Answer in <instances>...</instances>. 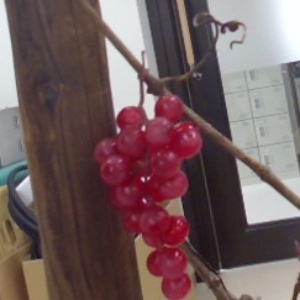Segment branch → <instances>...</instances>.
Returning a JSON list of instances; mask_svg holds the SVG:
<instances>
[{
    "instance_id": "obj_1",
    "label": "branch",
    "mask_w": 300,
    "mask_h": 300,
    "mask_svg": "<svg viewBox=\"0 0 300 300\" xmlns=\"http://www.w3.org/2000/svg\"><path fill=\"white\" fill-rule=\"evenodd\" d=\"M185 105V113L188 114L195 122H197L206 131H209L216 140L219 141L225 148H227L234 156L245 165H247L251 171L255 172L257 176L261 178V181L267 183L275 192L281 195L284 199L292 203L298 210H300V197L297 196L290 187L281 182L277 176H275L269 169L259 165L252 161L247 154H245L235 143H233L229 137L223 135L214 126L204 120L198 113H196L191 107Z\"/></svg>"
},
{
    "instance_id": "obj_2",
    "label": "branch",
    "mask_w": 300,
    "mask_h": 300,
    "mask_svg": "<svg viewBox=\"0 0 300 300\" xmlns=\"http://www.w3.org/2000/svg\"><path fill=\"white\" fill-rule=\"evenodd\" d=\"M203 15H208V11H201L197 13L195 16L192 18V24L194 27L201 26L205 23H207L209 20L212 22H215L216 26V37L213 40V43L211 44L210 48L207 50V52L201 57L199 62L191 68L189 72H187L185 75H182L180 77H166L162 80H158L156 77H154L151 72H149L147 69H145V82L148 84V93L151 95H156L158 97H163V96H168V95H173L172 92L166 88L163 83L170 81V80H175V81H182L185 80L187 77L193 74L195 70H197L203 61L209 56V54L212 52L214 49L215 45L217 44V41L219 39V26L221 27L220 32L221 34L226 33V27L231 31L235 32L238 30L239 26H242L244 31L242 34V37L240 40H231L229 43V48L233 49L234 43L238 44H243V41L245 40L246 34H247V27L246 24L242 20H237V19H231V20H226L224 23H221L219 20L213 18V17H207L201 22H197V19L200 18V16Z\"/></svg>"
},
{
    "instance_id": "obj_3",
    "label": "branch",
    "mask_w": 300,
    "mask_h": 300,
    "mask_svg": "<svg viewBox=\"0 0 300 300\" xmlns=\"http://www.w3.org/2000/svg\"><path fill=\"white\" fill-rule=\"evenodd\" d=\"M178 248L186 254L188 264L194 268L201 279L214 292L216 300H236L224 286L222 279L198 256L187 240L179 243Z\"/></svg>"
},
{
    "instance_id": "obj_4",
    "label": "branch",
    "mask_w": 300,
    "mask_h": 300,
    "mask_svg": "<svg viewBox=\"0 0 300 300\" xmlns=\"http://www.w3.org/2000/svg\"><path fill=\"white\" fill-rule=\"evenodd\" d=\"M79 6L87 13V15L96 22V24L104 31V35L108 37L113 47H115L129 62V64L139 73V69L142 64L134 56V54L127 48L124 42L117 37V35L111 30L110 26L96 14L92 6L86 1H79Z\"/></svg>"
}]
</instances>
